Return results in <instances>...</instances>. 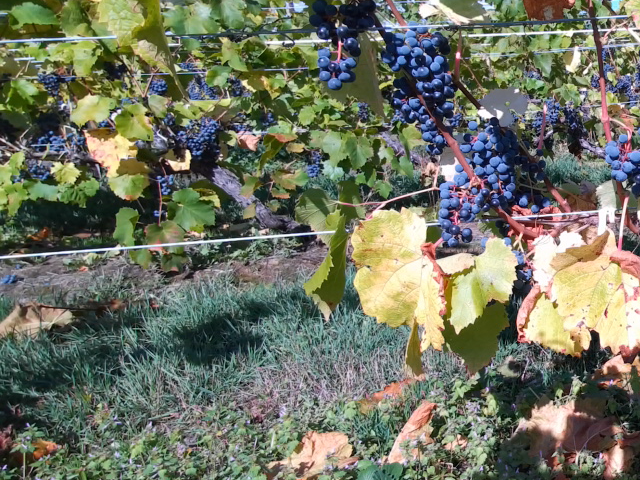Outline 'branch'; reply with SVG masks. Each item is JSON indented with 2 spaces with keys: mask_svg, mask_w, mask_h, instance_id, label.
I'll use <instances>...</instances> for the list:
<instances>
[{
  "mask_svg": "<svg viewBox=\"0 0 640 480\" xmlns=\"http://www.w3.org/2000/svg\"><path fill=\"white\" fill-rule=\"evenodd\" d=\"M594 32V42L596 45L597 65H598V84L600 86V106L602 131L607 141L612 139V133L609 129L608 104H607V85L605 82V63L603 53V43L601 39V30L596 20L591 22Z\"/></svg>",
  "mask_w": 640,
  "mask_h": 480,
  "instance_id": "branch-1",
  "label": "branch"
},
{
  "mask_svg": "<svg viewBox=\"0 0 640 480\" xmlns=\"http://www.w3.org/2000/svg\"><path fill=\"white\" fill-rule=\"evenodd\" d=\"M417 99L420 102V105L423 107V109L426 111V113L430 117V119L435 124V127L438 130H440L444 134V136L446 137L448 143L450 144L451 148L455 152L457 161L461 164V166L467 172V174L469 175L470 180L473 183H476L478 181V177L476 176V172L473 170V168L468 163V161L464 158L463 153H462V149L459 147L458 143L454 139V137H453L452 133L450 132V130L443 123H441L438 120V118L434 115L433 111L427 105V103L425 102V100H424V98H423L421 93L417 94Z\"/></svg>",
  "mask_w": 640,
  "mask_h": 480,
  "instance_id": "branch-2",
  "label": "branch"
},
{
  "mask_svg": "<svg viewBox=\"0 0 640 480\" xmlns=\"http://www.w3.org/2000/svg\"><path fill=\"white\" fill-rule=\"evenodd\" d=\"M493 212L498 217H501L502 220H504L505 222H508L509 224L513 225L516 229H518L519 231H521L523 234L527 235L528 237L534 238V239H537L539 237V233L537 231H533V230L529 229L528 227L524 226L518 220H515L510 215H508L505 212H503L498 206H495L493 208Z\"/></svg>",
  "mask_w": 640,
  "mask_h": 480,
  "instance_id": "branch-3",
  "label": "branch"
},
{
  "mask_svg": "<svg viewBox=\"0 0 640 480\" xmlns=\"http://www.w3.org/2000/svg\"><path fill=\"white\" fill-rule=\"evenodd\" d=\"M451 80L460 89V91L462 92V94L464 95L466 100L471 105H473L477 109L481 108V105L477 102V100L473 97V95L467 91V89L464 87V85L455 76H452Z\"/></svg>",
  "mask_w": 640,
  "mask_h": 480,
  "instance_id": "branch-4",
  "label": "branch"
},
{
  "mask_svg": "<svg viewBox=\"0 0 640 480\" xmlns=\"http://www.w3.org/2000/svg\"><path fill=\"white\" fill-rule=\"evenodd\" d=\"M545 183H546V186H547V188H548L549 192H550V193H551V195L554 197V199H555V200H556L560 205H562V207L564 208V211H565V212H569V211H570V208H569L568 204L566 203V201L564 200V198L562 197V195H561L558 191H555V189H554V187H553V185H552V183H551V181H550V179H549V178H546V179H545Z\"/></svg>",
  "mask_w": 640,
  "mask_h": 480,
  "instance_id": "branch-5",
  "label": "branch"
},
{
  "mask_svg": "<svg viewBox=\"0 0 640 480\" xmlns=\"http://www.w3.org/2000/svg\"><path fill=\"white\" fill-rule=\"evenodd\" d=\"M387 3L390 7L391 12L393 13L394 18L398 21V23L400 24V26H407V23L404 22V20L402 19L401 16H399V13L395 7V4L392 0H387Z\"/></svg>",
  "mask_w": 640,
  "mask_h": 480,
  "instance_id": "branch-6",
  "label": "branch"
},
{
  "mask_svg": "<svg viewBox=\"0 0 640 480\" xmlns=\"http://www.w3.org/2000/svg\"><path fill=\"white\" fill-rule=\"evenodd\" d=\"M631 216L629 211L626 209V214H625V225L634 233L636 234H640V227L634 226L631 222Z\"/></svg>",
  "mask_w": 640,
  "mask_h": 480,
  "instance_id": "branch-7",
  "label": "branch"
},
{
  "mask_svg": "<svg viewBox=\"0 0 640 480\" xmlns=\"http://www.w3.org/2000/svg\"><path fill=\"white\" fill-rule=\"evenodd\" d=\"M616 187H617L619 201L621 202V205H623V201L625 199L624 198V193H623V186H622L621 183H617Z\"/></svg>",
  "mask_w": 640,
  "mask_h": 480,
  "instance_id": "branch-8",
  "label": "branch"
},
{
  "mask_svg": "<svg viewBox=\"0 0 640 480\" xmlns=\"http://www.w3.org/2000/svg\"><path fill=\"white\" fill-rule=\"evenodd\" d=\"M367 15L370 16L375 21V26L376 27L383 26V24L381 23L379 17L374 12L368 11Z\"/></svg>",
  "mask_w": 640,
  "mask_h": 480,
  "instance_id": "branch-9",
  "label": "branch"
}]
</instances>
